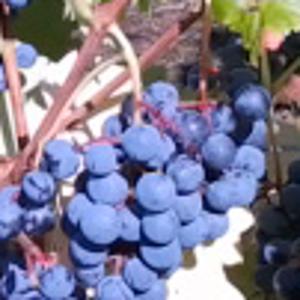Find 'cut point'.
<instances>
[{"label": "cut point", "instance_id": "cut-point-1", "mask_svg": "<svg viewBox=\"0 0 300 300\" xmlns=\"http://www.w3.org/2000/svg\"><path fill=\"white\" fill-rule=\"evenodd\" d=\"M111 37L115 40L117 45L122 49L127 57L130 75V91L134 95H139L142 92V86L139 55L136 48L120 30L119 25L116 22Z\"/></svg>", "mask_w": 300, "mask_h": 300}]
</instances>
